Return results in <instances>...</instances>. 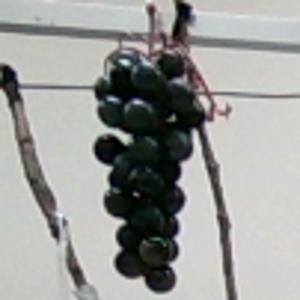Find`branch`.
<instances>
[{
    "instance_id": "3",
    "label": "branch",
    "mask_w": 300,
    "mask_h": 300,
    "mask_svg": "<svg viewBox=\"0 0 300 300\" xmlns=\"http://www.w3.org/2000/svg\"><path fill=\"white\" fill-rule=\"evenodd\" d=\"M174 5V21L171 24V41L174 47L185 53L188 59L186 82L194 86L197 100H200V85L197 80V66L191 55V34L189 28L196 27L197 15L193 13L194 6L186 0H171Z\"/></svg>"
},
{
    "instance_id": "2",
    "label": "branch",
    "mask_w": 300,
    "mask_h": 300,
    "mask_svg": "<svg viewBox=\"0 0 300 300\" xmlns=\"http://www.w3.org/2000/svg\"><path fill=\"white\" fill-rule=\"evenodd\" d=\"M201 150V160L206 171L207 182L210 184L214 205L216 207V222L219 231L221 249V268L225 285V300H240L236 283V263L233 260L231 231L233 224L227 211V201L224 197V187L221 183V164L215 158V151L209 139V130L204 126L194 129Z\"/></svg>"
},
{
    "instance_id": "1",
    "label": "branch",
    "mask_w": 300,
    "mask_h": 300,
    "mask_svg": "<svg viewBox=\"0 0 300 300\" xmlns=\"http://www.w3.org/2000/svg\"><path fill=\"white\" fill-rule=\"evenodd\" d=\"M0 90L5 95L11 112L23 176L38 210L47 223L50 238L54 239L55 245L63 253L67 273L74 284L70 293L75 300H102L98 289L87 281L85 271L75 255L67 217L62 216L61 221L59 220L57 199L43 173L36 153V142L26 118L18 71L4 61H0Z\"/></svg>"
}]
</instances>
